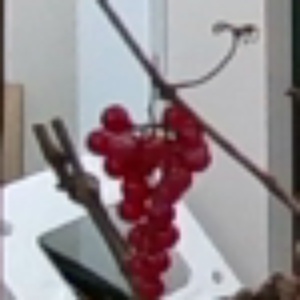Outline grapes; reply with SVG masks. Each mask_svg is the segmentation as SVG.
Wrapping results in <instances>:
<instances>
[{
    "label": "grapes",
    "mask_w": 300,
    "mask_h": 300,
    "mask_svg": "<svg viewBox=\"0 0 300 300\" xmlns=\"http://www.w3.org/2000/svg\"><path fill=\"white\" fill-rule=\"evenodd\" d=\"M100 124L103 129L93 130L87 145L94 154L105 155V175L122 179L117 213L135 223L126 231L135 251L125 268L132 272L140 299L159 300L165 294L162 277L172 266L166 250L180 238L171 224L176 219L173 203L213 163L212 149L203 140L207 130L199 115L178 104L163 108L161 124H133L119 104H110L100 112Z\"/></svg>",
    "instance_id": "grapes-1"
}]
</instances>
